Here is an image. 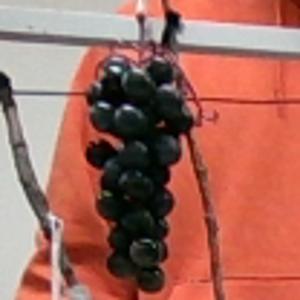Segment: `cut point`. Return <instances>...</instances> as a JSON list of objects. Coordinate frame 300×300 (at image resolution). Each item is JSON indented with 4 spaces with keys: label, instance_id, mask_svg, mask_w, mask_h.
Instances as JSON below:
<instances>
[{
    "label": "cut point",
    "instance_id": "1",
    "mask_svg": "<svg viewBox=\"0 0 300 300\" xmlns=\"http://www.w3.org/2000/svg\"><path fill=\"white\" fill-rule=\"evenodd\" d=\"M146 0H137L134 10V16L137 23L138 46H137V67L144 66V26L147 18Z\"/></svg>",
    "mask_w": 300,
    "mask_h": 300
}]
</instances>
